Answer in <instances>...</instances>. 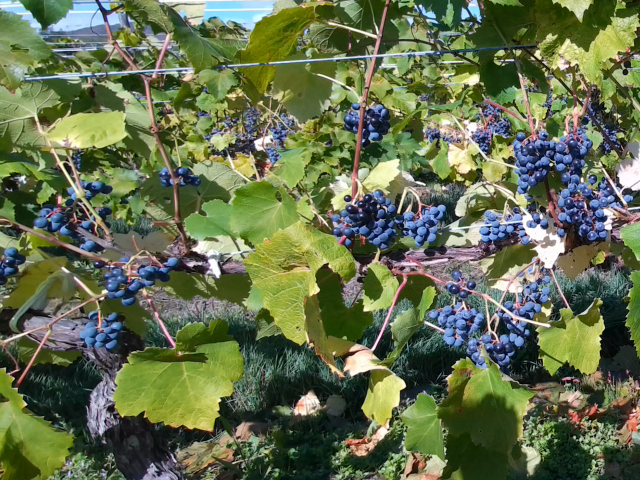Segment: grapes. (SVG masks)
<instances>
[{
  "label": "grapes",
  "instance_id": "5",
  "mask_svg": "<svg viewBox=\"0 0 640 480\" xmlns=\"http://www.w3.org/2000/svg\"><path fill=\"white\" fill-rule=\"evenodd\" d=\"M462 300L458 299L453 306L446 305L442 309L437 310L431 308L428 310V317L437 319L439 326L445 325L443 329V341L453 348H459L466 341V335L477 332L480 325L485 320V314L479 312L477 308H462Z\"/></svg>",
  "mask_w": 640,
  "mask_h": 480
},
{
  "label": "grapes",
  "instance_id": "17",
  "mask_svg": "<svg viewBox=\"0 0 640 480\" xmlns=\"http://www.w3.org/2000/svg\"><path fill=\"white\" fill-rule=\"evenodd\" d=\"M66 193L69 195V197H68V199H65L63 201V204L65 206H72L74 204L75 200H76V194L74 193V191L70 187H68L66 189Z\"/></svg>",
  "mask_w": 640,
  "mask_h": 480
},
{
  "label": "grapes",
  "instance_id": "3",
  "mask_svg": "<svg viewBox=\"0 0 640 480\" xmlns=\"http://www.w3.org/2000/svg\"><path fill=\"white\" fill-rule=\"evenodd\" d=\"M180 265L181 261L177 257L170 256L166 259V265L163 267L140 266L135 270V273L139 275L141 279H131L127 289H124L120 288V284H126L128 277L123 273L121 266L100 260L93 262V267L96 270L110 269L109 272L102 274V278L107 280L105 283L107 297L109 299H121V304L125 307H131L136 303L135 296L143 287L154 286L157 283V279L160 282H168L171 279V274L169 273L171 269L177 268Z\"/></svg>",
  "mask_w": 640,
  "mask_h": 480
},
{
  "label": "grapes",
  "instance_id": "1",
  "mask_svg": "<svg viewBox=\"0 0 640 480\" xmlns=\"http://www.w3.org/2000/svg\"><path fill=\"white\" fill-rule=\"evenodd\" d=\"M525 139L526 134L523 131H518L514 137V173L519 175L517 191L525 194L530 187L542 184L543 177L549 174L548 167L553 159L554 170L561 174L560 181L568 183L557 199L559 220L577 224L579 236L589 241L606 239L608 231L605 229V223L608 216L601 208L621 210L623 202L617 197L607 177L600 179L597 193H594L587 183L580 182L582 169L585 167L584 157L588 155V149L593 147V142L586 134L576 138L572 132L561 136L558 143L549 140L546 131H538L536 139L530 138L523 145ZM577 191L590 200V212L583 209L585 201L582 198L572 197V193Z\"/></svg>",
  "mask_w": 640,
  "mask_h": 480
},
{
  "label": "grapes",
  "instance_id": "13",
  "mask_svg": "<svg viewBox=\"0 0 640 480\" xmlns=\"http://www.w3.org/2000/svg\"><path fill=\"white\" fill-rule=\"evenodd\" d=\"M79 185L84 191V198L86 200H91L98 193L108 195L113 191V187L109 184H105L103 181L81 180Z\"/></svg>",
  "mask_w": 640,
  "mask_h": 480
},
{
  "label": "grapes",
  "instance_id": "2",
  "mask_svg": "<svg viewBox=\"0 0 640 480\" xmlns=\"http://www.w3.org/2000/svg\"><path fill=\"white\" fill-rule=\"evenodd\" d=\"M354 205L347 204L339 214H332L330 220L338 222L341 218L344 222L332 229V234L337 238L345 236L343 245L352 247V238L359 234L366 237L369 245L377 246L380 250H386L389 243H394L396 228L403 236H410L417 247H423L426 242L434 243L438 231V221L444 219L447 208L444 204L437 207L424 206L420 209V218L414 219L413 211H405L393 216L397 207L392 204L390 198L385 197L381 189H375L371 193L366 192L363 200H357Z\"/></svg>",
  "mask_w": 640,
  "mask_h": 480
},
{
  "label": "grapes",
  "instance_id": "18",
  "mask_svg": "<svg viewBox=\"0 0 640 480\" xmlns=\"http://www.w3.org/2000/svg\"><path fill=\"white\" fill-rule=\"evenodd\" d=\"M89 218L90 220H80L78 222V225H81L86 230H93L95 228V225L92 222L94 221V219L91 217V215H89Z\"/></svg>",
  "mask_w": 640,
  "mask_h": 480
},
{
  "label": "grapes",
  "instance_id": "14",
  "mask_svg": "<svg viewBox=\"0 0 640 480\" xmlns=\"http://www.w3.org/2000/svg\"><path fill=\"white\" fill-rule=\"evenodd\" d=\"M176 178L180 177L178 186L184 188L189 185L191 187H198L201 184V177L184 166H180L175 170Z\"/></svg>",
  "mask_w": 640,
  "mask_h": 480
},
{
  "label": "grapes",
  "instance_id": "16",
  "mask_svg": "<svg viewBox=\"0 0 640 480\" xmlns=\"http://www.w3.org/2000/svg\"><path fill=\"white\" fill-rule=\"evenodd\" d=\"M446 289H447V290L449 291V293H450V294H452V295H457V294H458V296H459L460 298H467V297L469 296V293L463 292V291L460 289V286H459V285H455L454 283H447V284H446Z\"/></svg>",
  "mask_w": 640,
  "mask_h": 480
},
{
  "label": "grapes",
  "instance_id": "9",
  "mask_svg": "<svg viewBox=\"0 0 640 480\" xmlns=\"http://www.w3.org/2000/svg\"><path fill=\"white\" fill-rule=\"evenodd\" d=\"M521 208L519 206H514L512 208V215L504 214L502 212L495 213L491 210H487L485 212V216L487 217L484 222H490L491 227H482L479 229V233L483 235L481 237V241L485 243L486 241H495L497 239H506L508 234H511L515 229L519 230L520 240L522 245H528L531 242V238L527 235V232L524 230V225H516V226H502L501 221L504 217L505 221H514V220H523V214L520 212Z\"/></svg>",
  "mask_w": 640,
  "mask_h": 480
},
{
  "label": "grapes",
  "instance_id": "8",
  "mask_svg": "<svg viewBox=\"0 0 640 480\" xmlns=\"http://www.w3.org/2000/svg\"><path fill=\"white\" fill-rule=\"evenodd\" d=\"M550 283L551 278L549 275H544L542 279H537L536 282H529L524 286V290L521 291V295L518 300V303L522 304L526 297L527 303H525L524 306H520L516 309L512 300H505L503 302V307L507 311L519 317L532 320L535 313L542 312V305H546L548 303V297L550 296V288L543 287L540 294L537 291L539 285Z\"/></svg>",
  "mask_w": 640,
  "mask_h": 480
},
{
  "label": "grapes",
  "instance_id": "12",
  "mask_svg": "<svg viewBox=\"0 0 640 480\" xmlns=\"http://www.w3.org/2000/svg\"><path fill=\"white\" fill-rule=\"evenodd\" d=\"M524 199L528 202H531L527 207L526 211L531 213V219L526 221V226L529 229H535L539 226L541 230H546L549 227V221L547 219H543V217L536 212L537 211V203L534 200V197L531 194H526Z\"/></svg>",
  "mask_w": 640,
  "mask_h": 480
},
{
  "label": "grapes",
  "instance_id": "4",
  "mask_svg": "<svg viewBox=\"0 0 640 480\" xmlns=\"http://www.w3.org/2000/svg\"><path fill=\"white\" fill-rule=\"evenodd\" d=\"M496 315L501 317L502 323L510 331L508 334H500L497 338V342L492 340V336L487 332H484L481 336V340L472 338L467 341V354L471 356V359L477 367L487 368L488 364L485 363L483 357H479L478 348L480 345L485 344V351L489 354V357L497 360V364L500 367H504L510 363V357L515 354V347L521 348L525 345V339L530 337V330L527 327V323L522 321H514L512 317L506 315L502 310L498 309Z\"/></svg>",
  "mask_w": 640,
  "mask_h": 480
},
{
  "label": "grapes",
  "instance_id": "7",
  "mask_svg": "<svg viewBox=\"0 0 640 480\" xmlns=\"http://www.w3.org/2000/svg\"><path fill=\"white\" fill-rule=\"evenodd\" d=\"M73 219L70 210L65 211L57 205L46 204L37 213V217L32 219V224L37 229H47L49 232H58L61 235L69 236L71 239H80L83 243L79 246L91 252L101 251L103 247L85 238L75 230V225L69 223Z\"/></svg>",
  "mask_w": 640,
  "mask_h": 480
},
{
  "label": "grapes",
  "instance_id": "11",
  "mask_svg": "<svg viewBox=\"0 0 640 480\" xmlns=\"http://www.w3.org/2000/svg\"><path fill=\"white\" fill-rule=\"evenodd\" d=\"M5 260H0V284L5 285L8 277L15 276L19 268L15 265H22L26 262L25 256L19 254L16 247H7L3 250Z\"/></svg>",
  "mask_w": 640,
  "mask_h": 480
},
{
  "label": "grapes",
  "instance_id": "6",
  "mask_svg": "<svg viewBox=\"0 0 640 480\" xmlns=\"http://www.w3.org/2000/svg\"><path fill=\"white\" fill-rule=\"evenodd\" d=\"M98 312L91 310L87 314L88 321L84 329L80 332V339L84 341L87 347H104L106 350H113L117 345L116 338L119 336V330L123 328L125 316L117 312L110 311L108 315L101 320L100 329L97 328Z\"/></svg>",
  "mask_w": 640,
  "mask_h": 480
},
{
  "label": "grapes",
  "instance_id": "15",
  "mask_svg": "<svg viewBox=\"0 0 640 480\" xmlns=\"http://www.w3.org/2000/svg\"><path fill=\"white\" fill-rule=\"evenodd\" d=\"M351 108L353 110H350L347 115H345L343 117V121L345 122V129L350 132L351 134H357L358 131V115L359 113L357 111L360 110L361 108V104L359 102H353L351 104Z\"/></svg>",
  "mask_w": 640,
  "mask_h": 480
},
{
  "label": "grapes",
  "instance_id": "10",
  "mask_svg": "<svg viewBox=\"0 0 640 480\" xmlns=\"http://www.w3.org/2000/svg\"><path fill=\"white\" fill-rule=\"evenodd\" d=\"M390 111L380 103L368 106L363 118L361 145L367 148L371 141H382L391 128Z\"/></svg>",
  "mask_w": 640,
  "mask_h": 480
}]
</instances>
